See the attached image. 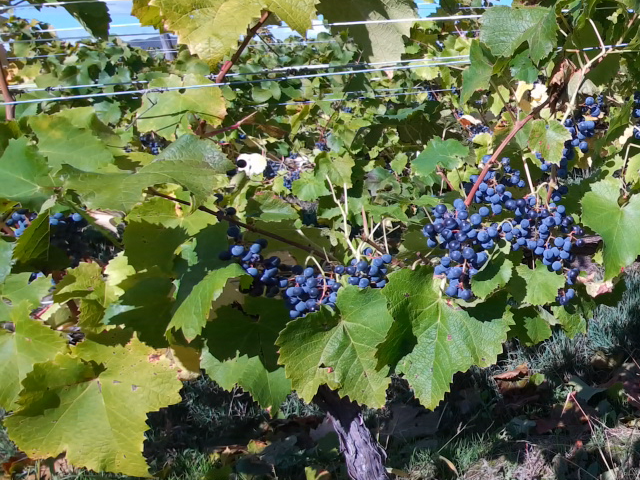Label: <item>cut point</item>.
<instances>
[{"mask_svg": "<svg viewBox=\"0 0 640 480\" xmlns=\"http://www.w3.org/2000/svg\"><path fill=\"white\" fill-rule=\"evenodd\" d=\"M310 259L313 260L314 263H317L316 257H314L312 253H309V255L304 260V265H308Z\"/></svg>", "mask_w": 640, "mask_h": 480, "instance_id": "obj_1", "label": "cut point"}, {"mask_svg": "<svg viewBox=\"0 0 640 480\" xmlns=\"http://www.w3.org/2000/svg\"><path fill=\"white\" fill-rule=\"evenodd\" d=\"M365 240H361L360 244L358 245L357 249H356V259L359 260V251L361 250L362 246L364 245Z\"/></svg>", "mask_w": 640, "mask_h": 480, "instance_id": "obj_2", "label": "cut point"}]
</instances>
